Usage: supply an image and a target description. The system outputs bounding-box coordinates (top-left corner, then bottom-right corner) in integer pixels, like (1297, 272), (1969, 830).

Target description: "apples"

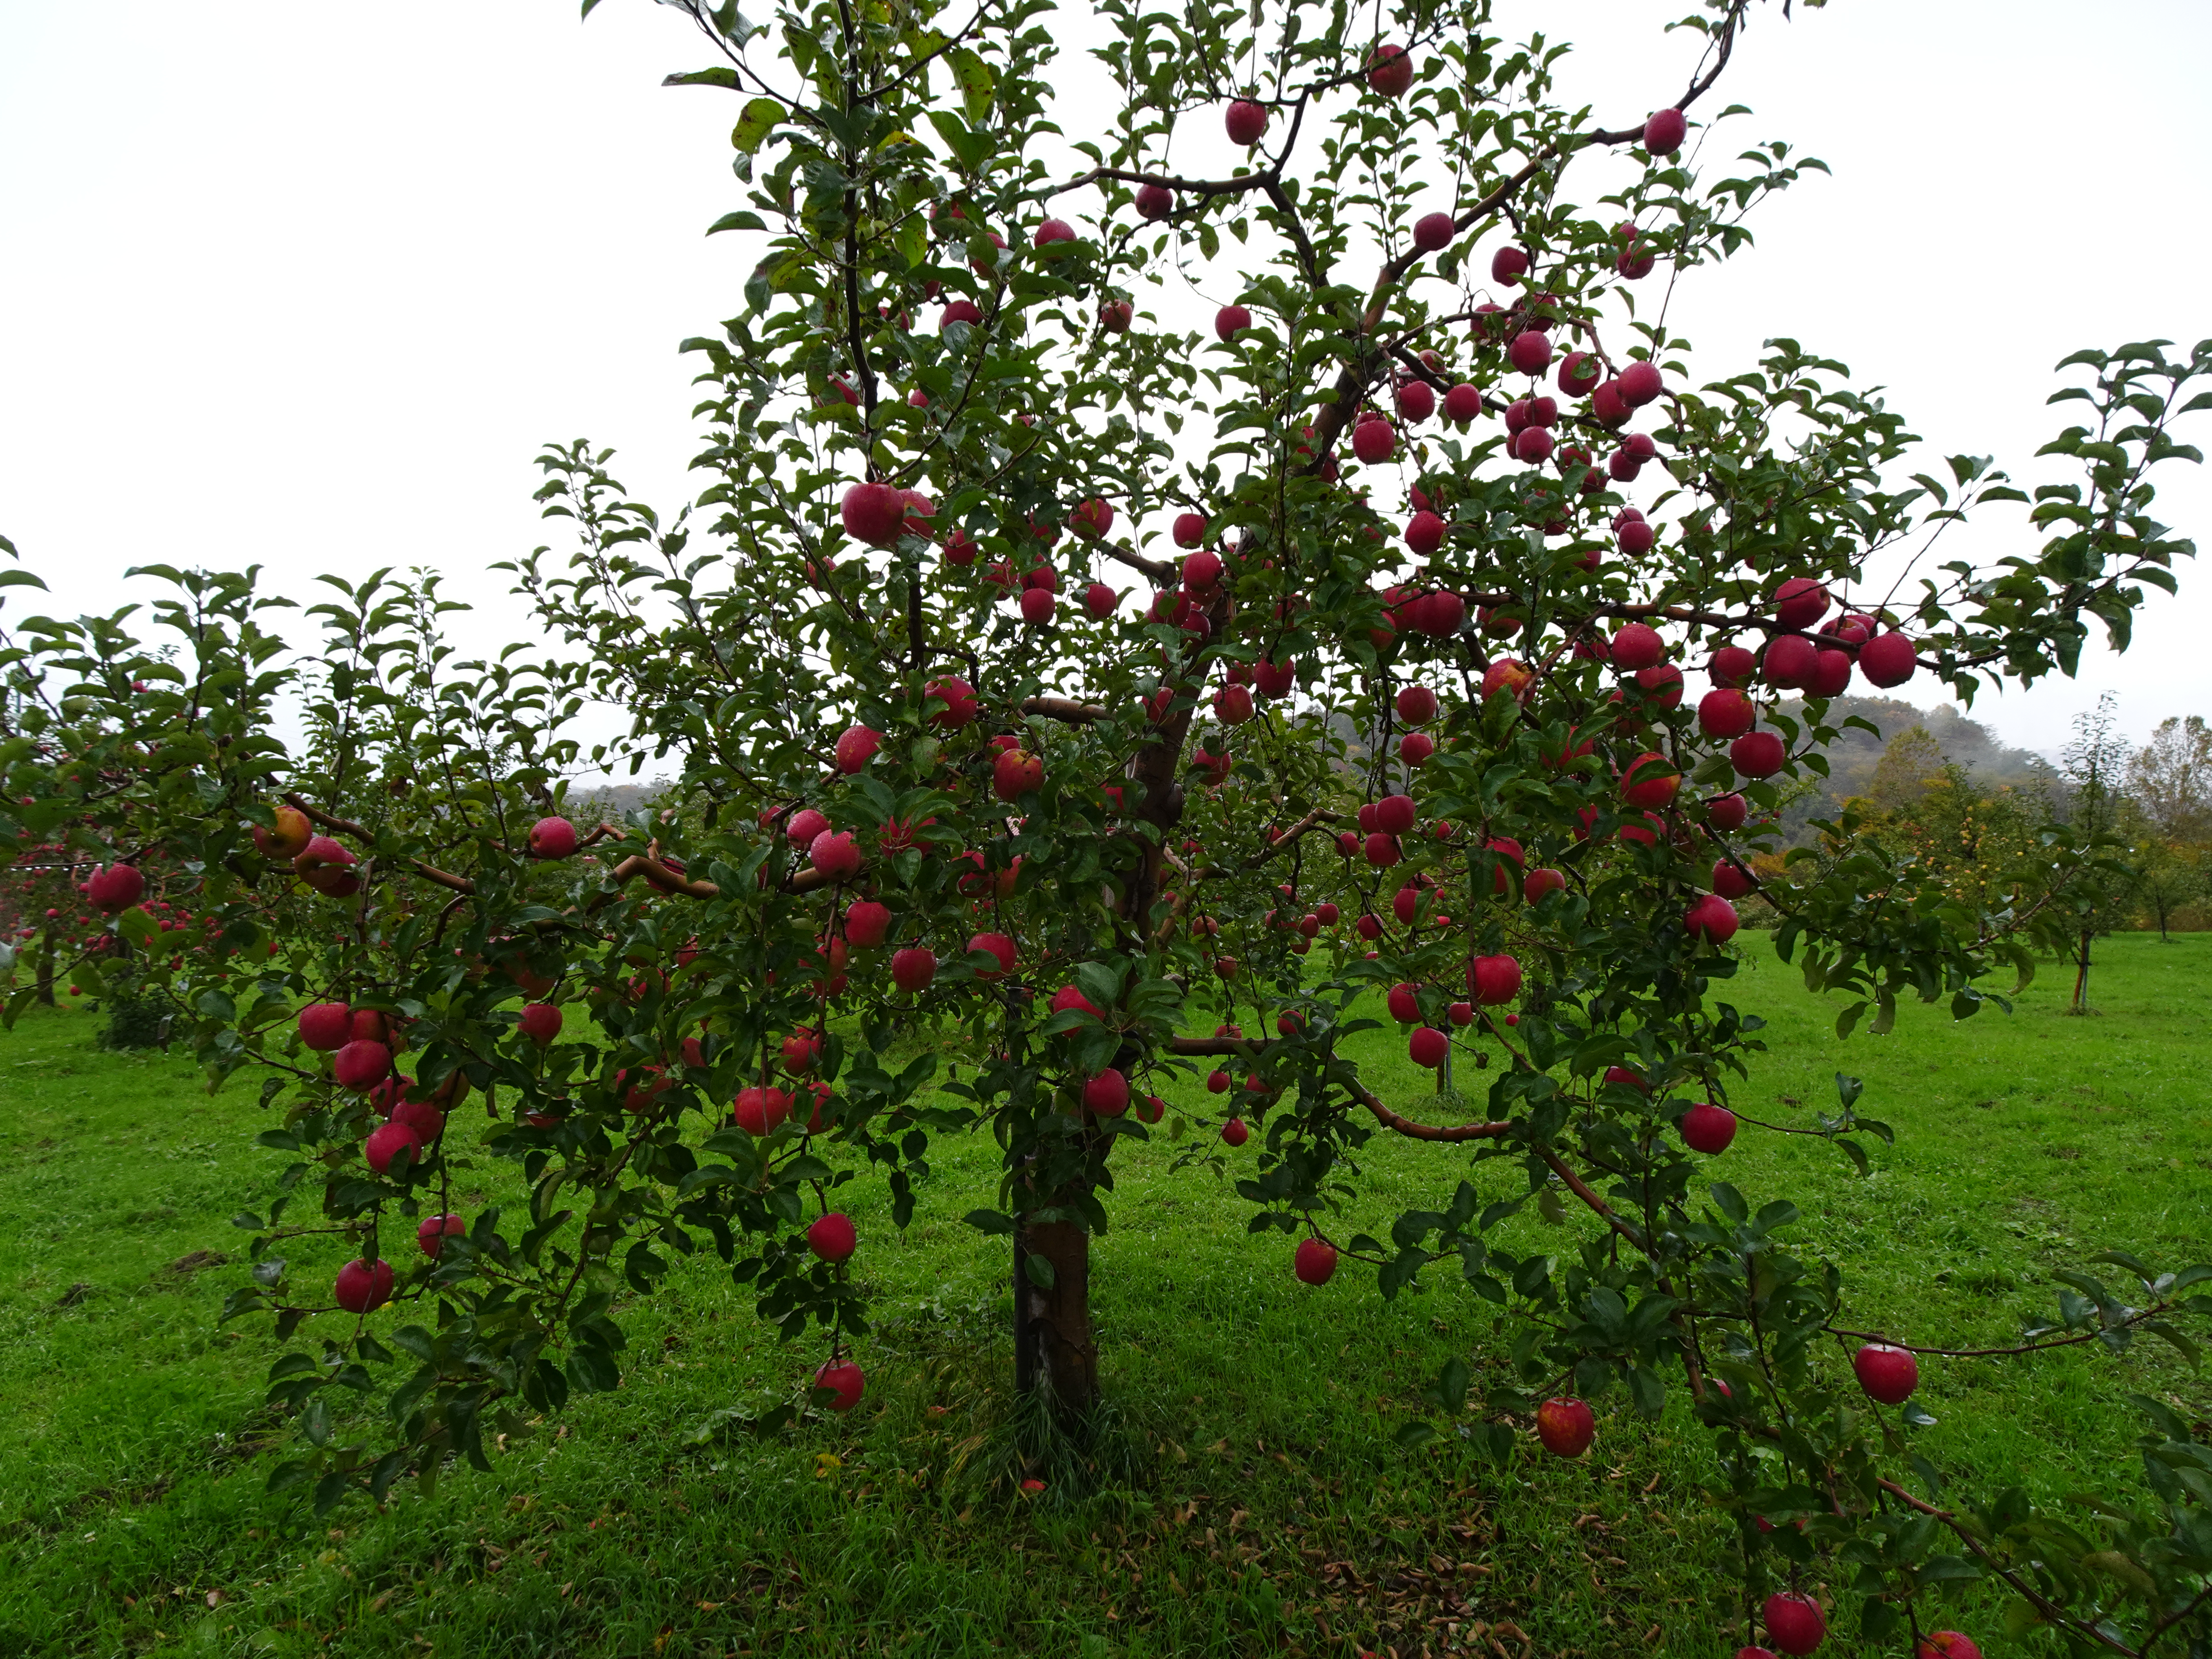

(1573, 638), (1611, 660)
(1481, 658), (1536, 707)
(1387, 983), (1424, 1024)
(1544, 504), (1571, 536)
(1221, 1118), (1248, 1147)
(1516, 426), (1553, 464)
(1142, 607), (1156, 623)
(1484, 837), (1524, 894)
(1524, 869), (1566, 905)
(840, 483), (905, 547)
(1083, 583), (1116, 619)
(835, 725), (896, 776)
(1398, 366), (1420, 385)
(1413, 212), (1454, 251)
(432, 1070), (473, 1112)
(1222, 542), (1247, 564)
(1043, 949), (1061, 960)
(1272, 885), (1298, 907)
(1580, 466), (1608, 494)
(986, 735), (1021, 765)
(1192, 916), (1218, 943)
(294, 837), (346, 887)
(1593, 380), (1634, 429)
(1295, 1238), (1337, 1286)
(1225, 96), (1266, 145)
(88, 862), (144, 913)
(1817, 618), (1869, 664)
(1708, 647), (1756, 689)
(946, 784), (963, 815)
(799, 933), (847, 981)
(1754, 1514), (1774, 1533)
(1644, 108), (1688, 156)
(1362, 527), (1381, 539)
(1214, 955), (1237, 980)
(686, 936), (697, 944)
(1161, 645), (1170, 667)
(1509, 331), (1552, 376)
(1018, 565), (1056, 592)
(1609, 758), (1617, 775)
(1365, 951), (1382, 964)
(869, 307), (910, 337)
(1184, 580), (1224, 606)
(912, 262), (940, 302)
(1613, 507), (1645, 533)
(967, 932), (1017, 979)
(1606, 690), (1648, 738)
(1335, 832), (1360, 857)
(1617, 240), (1655, 280)
(1333, 928), (1338, 934)
(1134, 183), (1173, 218)
(1215, 305), (1251, 343)
(1274, 594), (1310, 629)
(1424, 819), (1451, 840)
(1365, 832), (1402, 866)
(766, 970), (776, 985)
(1620, 810), (1667, 849)
(1708, 1377), (1732, 1398)
(1069, 498), (1113, 541)
(1182, 551), (1222, 593)
(1194, 746), (1231, 786)
(1492, 246), (1527, 287)
(1419, 349), (1445, 374)
(634, 906), (648, 918)
(811, 829), (860, 882)
(519, 1003), (563, 1046)
(1021, 988), (1034, 1001)
(1136, 1096), (1164, 1124)
(1345, 491), (1367, 507)
(1048, 996), (1056, 1014)
(1158, 868), (1167, 893)
(1523, 396), (1557, 429)
(1466, 953), (1521, 1006)
(1854, 1344), (1918, 1406)
(525, 1095), (565, 1129)
(1173, 512), (1207, 549)
(909, 388), (944, 425)
(335, 1257), (394, 1314)
(1290, 938), (1311, 954)
(1275, 689), (1289, 698)
(845, 902), (892, 949)
(1370, 611), (1396, 648)
(1634, 663), (1683, 710)
(1215, 1025), (1242, 1039)
(1353, 421), (1395, 465)
(1400, 734), (1433, 768)
(391, 1097), (444, 1147)
(1616, 360), (1663, 408)
(1409, 1027), (1449, 1068)
(1277, 1011), (1304, 1037)
(1611, 623), (1665, 670)
(1099, 781), (1125, 810)
(388, 1026), (411, 1057)
(1402, 874), (1437, 904)
(787, 1082), (836, 1136)
(1302, 904), (1308, 909)
(943, 529), (976, 565)
(487, 936), (529, 977)
(1706, 791), (1746, 831)
(1561, 445), (1592, 472)
(971, 232), (1009, 278)
(1299, 914), (1319, 938)
(318, 850), (360, 898)
(1505, 1014), (1519, 1027)
(1317, 452), (1338, 483)
(1542, 726), (1592, 767)
(929, 201), (967, 240)
(888, 489), (936, 548)
(1667, 808), (1682, 819)
(812, 973), (847, 997)
(1444, 382), (1482, 424)
(1141, 686), (1176, 724)
(805, 556), (837, 591)
(1505, 399), (1530, 437)
(1519, 294), (1557, 333)
(1764, 1591), (1825, 1655)
(648, 859), (684, 896)
(454, 950), (484, 984)
(1730, 732), (1785, 778)
(1316, 903), (1339, 926)
(990, 857), (1024, 900)
(807, 1213), (856, 1263)
(981, 563), (1017, 601)
(1621, 751), (1681, 811)
(1436, 916), (1450, 926)
(1618, 521), (1653, 557)
(1743, 548), (1766, 571)
(1355, 412), (1387, 428)
(1102, 299), (1132, 333)
(1558, 351), (1602, 398)
(1858, 631), (1916, 688)
(993, 748), (1046, 803)
(973, 898), (993, 912)
(1021, 819), (1027, 826)
(630, 967), (671, 1001)
(299, 1002), (354, 1051)
(1297, 426), (1318, 462)
(366, 1122), (421, 1176)
(1381, 585), (1421, 630)
(1254, 654), (1294, 698)
(592, 987), (628, 1006)
(1573, 550), (1601, 574)
(879, 816), (936, 861)
(816, 374), (859, 408)
(1477, 605), (1521, 640)
(1190, 601), (1202, 610)
(1503, 315), (1523, 346)
(1164, 891), (1177, 904)
(781, 1026), (826, 1078)
(700, 1017), (725, 1039)
(1844, 614), (1877, 640)
(1622, 433), (1654, 464)
(1525, 491), (1545, 504)
(1017, 415), (1034, 427)
(349, 1009), (389, 1043)
(1035, 218), (1077, 260)
(1435, 888), (1444, 899)
(618, 1059), (672, 1111)
(815, 1359), (864, 1411)
(254, 805), (312, 859)
(1415, 591), (1464, 638)
(1405, 510), (1448, 556)
(1673, 821), (1704, 853)
(1152, 590), (1190, 627)
(531, 817), (575, 858)
(1571, 805), (1614, 847)
(676, 944), (698, 969)
(1605, 1067), (1646, 1092)
(1613, 222), (1640, 246)
(1698, 689), (1755, 739)
(1081, 1067), (1129, 1118)
(1029, 512), (1059, 545)
(1202, 951), (1210, 961)
(335, 1040), (392, 1092)
(1397, 687), (1436, 726)
(1410, 483), (1444, 513)
(589, 891), (626, 908)
(1764, 635), (1818, 690)
(1358, 804), (1380, 835)
(1537, 1397), (1594, 1458)
(515, 969), (556, 999)
(1802, 650), (1851, 698)
(1213, 683), (1252, 724)
(1471, 303), (1503, 345)
(892, 947), (937, 992)
(662, 1035), (707, 1069)
(1266, 908), (1297, 932)
(758, 862), (769, 889)
(1020, 588), (1055, 625)
(1393, 889), (1431, 925)
(1374, 794), (1416, 837)
(940, 299), (983, 330)
(758, 805), (786, 840)
(1006, 552), (1046, 579)
(1261, 559), (1272, 569)
(1398, 381), (1435, 422)
(1774, 578), (1830, 630)
(1918, 1631), (1984, 1659)
(1683, 894), (1738, 945)
(734, 1086), (787, 1137)
(1683, 1103), (1736, 1155)
(1265, 825), (1284, 842)
(1521, 500), (1540, 528)
(1506, 432), (1518, 459)
(951, 851), (993, 898)
(1449, 1002), (1472, 1026)
(625, 955), (649, 968)
(1609, 450), (1641, 482)
(1734, 1646), (1780, 1659)
(1053, 984), (1104, 1038)
(1366, 44), (1413, 96)
(787, 809), (830, 851)
(1712, 857), (1755, 900)
(370, 1076), (416, 1117)
(1796, 1519), (1809, 1535)
(925, 674), (977, 729)
(975, 921), (983, 929)
(1179, 610), (1211, 651)
(1357, 913), (1383, 940)
(1182, 841), (1204, 862)
(419, 1214), (465, 1260)
(1226, 662), (1254, 685)
(1244, 1073), (1270, 1105)
(1215, 895), (1221, 901)
(1207, 1070), (1230, 1094)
